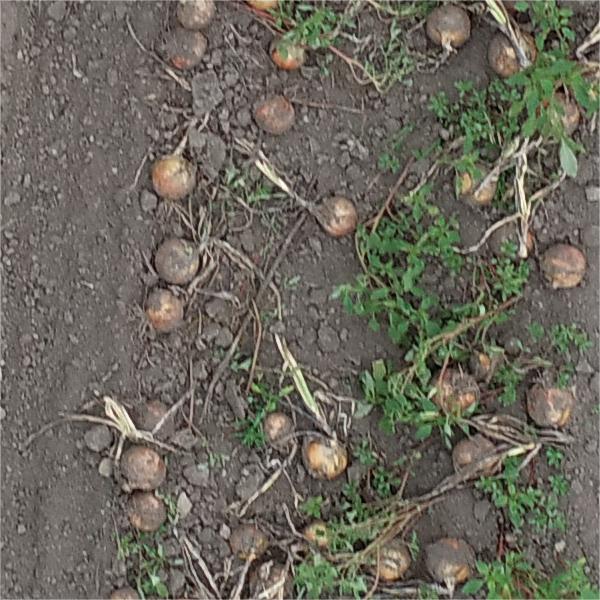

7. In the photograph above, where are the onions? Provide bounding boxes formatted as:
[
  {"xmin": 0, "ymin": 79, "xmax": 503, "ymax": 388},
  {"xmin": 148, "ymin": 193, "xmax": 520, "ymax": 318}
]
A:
[
  {"xmin": 154, "ymin": 237, "xmax": 197, "ymax": 283},
  {"xmin": 120, "ymin": 446, "xmax": 164, "ymax": 488},
  {"xmin": 162, "ymin": 28, "xmax": 207, "ymax": 68},
  {"xmin": 230, "ymin": 522, "xmax": 267, "ymax": 560},
  {"xmin": 245, "ymin": 0, "xmax": 276, "ymax": 13},
  {"xmin": 454, "ymin": 437, "xmax": 489, "ymax": 469},
  {"xmin": 152, "ymin": 154, "xmax": 194, "ymax": 198},
  {"xmin": 316, "ymin": 195, "xmax": 358, "ymax": 236},
  {"xmin": 424, "ymin": 536, "xmax": 474, "ymax": 587},
  {"xmin": 491, "ymin": 27, "xmax": 531, "ymax": 75},
  {"xmin": 261, "ymin": 412, "xmax": 290, "ymax": 444},
  {"xmin": 512, "ymin": 224, "xmax": 536, "ymax": 257},
  {"xmin": 123, "ymin": 491, "xmax": 164, "ymax": 531},
  {"xmin": 249, "ymin": 564, "xmax": 291, "ymax": 600},
  {"xmin": 375, "ymin": 543, "xmax": 409, "ymax": 581},
  {"xmin": 533, "ymin": 90, "xmax": 581, "ymax": 136},
  {"xmin": 252, "ymin": 93, "xmax": 293, "ymax": 132},
  {"xmin": 463, "ymin": 168, "xmax": 499, "ymax": 205},
  {"xmin": 305, "ymin": 518, "xmax": 330, "ymax": 546},
  {"xmin": 269, "ymin": 34, "xmax": 303, "ymax": 69},
  {"xmin": 303, "ymin": 437, "xmax": 346, "ymax": 476},
  {"xmin": 427, "ymin": 5, "xmax": 469, "ymax": 49},
  {"xmin": 174, "ymin": 0, "xmax": 212, "ymax": 30},
  {"xmin": 436, "ymin": 369, "xmax": 478, "ymax": 414},
  {"xmin": 527, "ymin": 382, "xmax": 573, "ymax": 427},
  {"xmin": 541, "ymin": 243, "xmax": 584, "ymax": 289},
  {"xmin": 143, "ymin": 286, "xmax": 185, "ymax": 329},
  {"xmin": 131, "ymin": 397, "xmax": 173, "ymax": 441},
  {"xmin": 471, "ymin": 349, "xmax": 494, "ymax": 379},
  {"xmin": 108, "ymin": 584, "xmax": 139, "ymax": 600}
]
